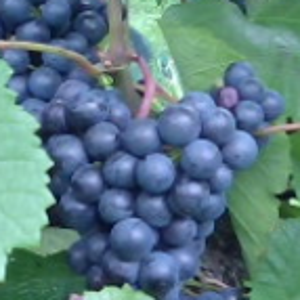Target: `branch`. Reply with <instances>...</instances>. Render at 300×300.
Returning a JSON list of instances; mask_svg holds the SVG:
<instances>
[{
	"label": "branch",
	"mask_w": 300,
	"mask_h": 300,
	"mask_svg": "<svg viewBox=\"0 0 300 300\" xmlns=\"http://www.w3.org/2000/svg\"><path fill=\"white\" fill-rule=\"evenodd\" d=\"M0 47L2 49H33L57 53L82 63L91 72L100 75H115L120 90L127 99V105L131 106L132 109H136L141 103V97L131 81L123 59L121 49V4L117 0H112L108 4V53L112 68L94 65L82 54L74 50L42 42H2Z\"/></svg>",
	"instance_id": "30e6481e"
}]
</instances>
